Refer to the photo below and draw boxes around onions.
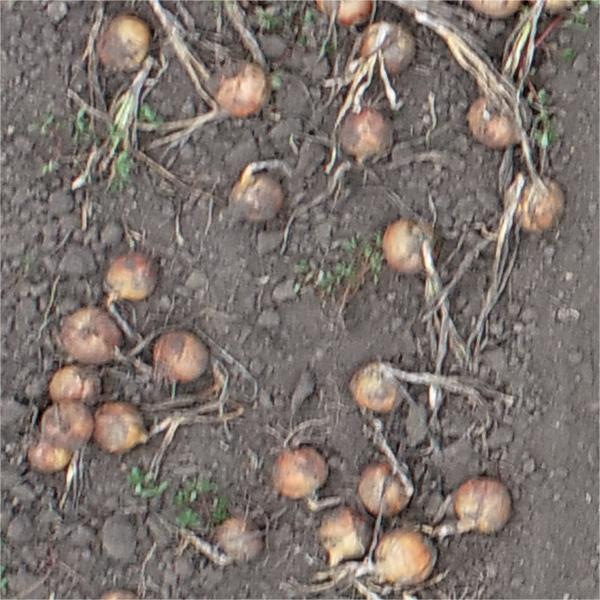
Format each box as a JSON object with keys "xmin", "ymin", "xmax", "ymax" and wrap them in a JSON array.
[
  {"xmin": 43, "ymin": 402, "xmax": 92, "ymax": 446},
  {"xmin": 102, "ymin": 585, "xmax": 135, "ymax": 599},
  {"xmin": 354, "ymin": 24, "xmax": 393, "ymax": 59},
  {"xmin": 469, "ymin": 0, "xmax": 518, "ymax": 18},
  {"xmin": 215, "ymin": 513, "xmax": 260, "ymax": 560},
  {"xmin": 47, "ymin": 366, "xmax": 94, "ymax": 403},
  {"xmin": 270, "ymin": 445, "xmax": 326, "ymax": 498},
  {"xmin": 230, "ymin": 163, "xmax": 283, "ymax": 219},
  {"xmin": 315, "ymin": 504, "xmax": 369, "ymax": 563},
  {"xmin": 104, "ymin": 252, "xmax": 155, "ymax": 300},
  {"xmin": 543, "ymin": 0, "xmax": 572, "ymax": 19},
  {"xmin": 453, "ymin": 477, "xmax": 509, "ymax": 531},
  {"xmin": 356, "ymin": 463, "xmax": 409, "ymax": 514},
  {"xmin": 382, "ymin": 220, "xmax": 427, "ymax": 270},
  {"xmin": 214, "ymin": 64, "xmax": 267, "ymax": 115},
  {"xmin": 57, "ymin": 305, "xmax": 120, "ymax": 365},
  {"xmin": 328, "ymin": 0, "xmax": 372, "ymax": 28},
  {"xmin": 93, "ymin": 403, "xmax": 146, "ymax": 452},
  {"xmin": 359, "ymin": 25, "xmax": 413, "ymax": 74},
  {"xmin": 376, "ymin": 529, "xmax": 433, "ymax": 581},
  {"xmin": 333, "ymin": 107, "xmax": 392, "ymax": 161},
  {"xmin": 347, "ymin": 361, "xmax": 396, "ymax": 412},
  {"xmin": 466, "ymin": 98, "xmax": 515, "ymax": 148},
  {"xmin": 152, "ymin": 330, "xmax": 207, "ymax": 383},
  {"xmin": 514, "ymin": 176, "xmax": 563, "ymax": 233},
  {"xmin": 96, "ymin": 17, "xmax": 149, "ymax": 69},
  {"xmin": 29, "ymin": 438, "xmax": 69, "ymax": 473}
]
